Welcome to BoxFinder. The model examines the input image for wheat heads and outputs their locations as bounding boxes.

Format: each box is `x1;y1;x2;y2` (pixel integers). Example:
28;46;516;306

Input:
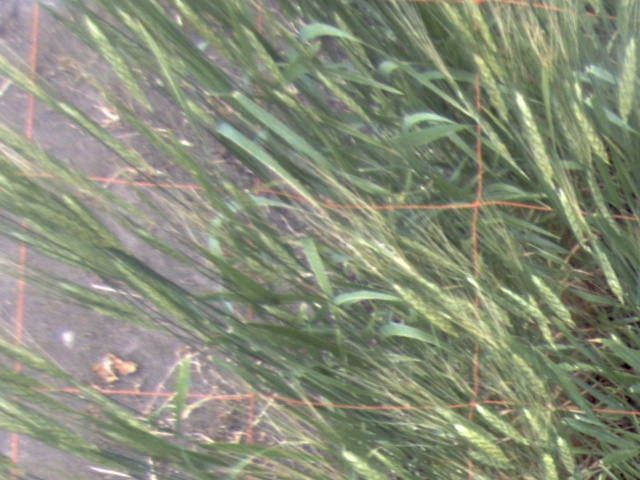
456;428;505;463
531;275;573;329
222;182;267;216
278;91;305;116
40;224;114;270
402;294;459;340
243;253;290;286
26;203;93;241
569;104;610;159
69;193;118;243
474;6;498;50
343;451;382;480
505;289;537;318
75;444;129;477
1;125;72;179
255;231;303;271
594;254;626;302
315;76;363;124
532;295;558;350
65;285;144;319
525;406;544;439
621;38;640;119
444;2;472;38
119;268;182;318
542;456;557;474
585;175;621;237
68;108;133;161
176;1;221;40
80;386;150;433
84;18;147;108
3;404;60;443
514;355;547;401
263;303;305;327
513;95;552;182
238;25;285;83
560;192;588;249
556;438;578;473
3;380;57;407
471;54;511;122
374;450;397;473
478;405;523;444
401;239;453;271
139;226;180;260
1;336;61;374
12;230;79;262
